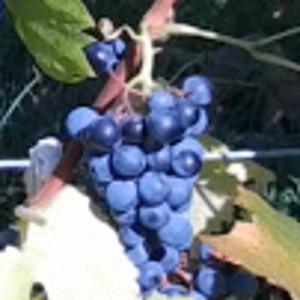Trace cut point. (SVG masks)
Wrapping results in <instances>:
<instances>
[{
	"label": "cut point",
	"mask_w": 300,
	"mask_h": 300,
	"mask_svg": "<svg viewBox=\"0 0 300 300\" xmlns=\"http://www.w3.org/2000/svg\"><path fill=\"white\" fill-rule=\"evenodd\" d=\"M142 62V74L135 77L126 87L127 91H132L135 84L140 81L149 83L153 88H157L159 83L155 80L154 50L151 42L145 40L140 50Z\"/></svg>",
	"instance_id": "obj_1"
}]
</instances>
